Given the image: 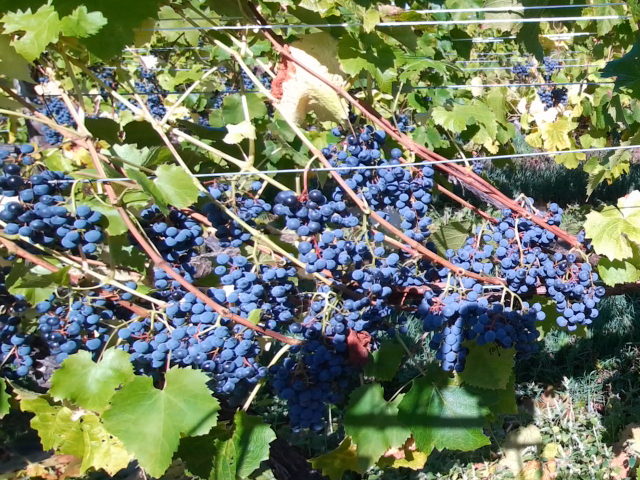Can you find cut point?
<instances>
[{
  "mask_svg": "<svg viewBox=\"0 0 640 480\" xmlns=\"http://www.w3.org/2000/svg\"><path fill=\"white\" fill-rule=\"evenodd\" d=\"M522 216H523V210L519 209L518 213H517V215H516V217H515V219L513 221V232H514V235L516 237V244L518 246L522 245L521 235H520L519 229H518V223L521 220Z\"/></svg>",
  "mask_w": 640,
  "mask_h": 480,
  "instance_id": "40658cd0",
  "label": "cut point"
},
{
  "mask_svg": "<svg viewBox=\"0 0 640 480\" xmlns=\"http://www.w3.org/2000/svg\"><path fill=\"white\" fill-rule=\"evenodd\" d=\"M499 283H500V285H501V286H502V288H503V289H502V293H501V298H502V299H505V298H506V296H507V294H508V295L510 296V299H509V303H510V304H513L515 300H516L517 302H520V301H521V298H520L519 294H518L517 292L512 291V290L509 288V286L505 283V280H504V278H503V277H500V278H499Z\"/></svg>",
  "mask_w": 640,
  "mask_h": 480,
  "instance_id": "6a23745f",
  "label": "cut point"
},
{
  "mask_svg": "<svg viewBox=\"0 0 640 480\" xmlns=\"http://www.w3.org/2000/svg\"><path fill=\"white\" fill-rule=\"evenodd\" d=\"M318 159V154L314 153L313 157H311L307 164L304 166L306 168V171L302 174V185H303V190L307 191L308 190V182H307V176H308V170L312 167L313 163Z\"/></svg>",
  "mask_w": 640,
  "mask_h": 480,
  "instance_id": "deb38ca7",
  "label": "cut point"
},
{
  "mask_svg": "<svg viewBox=\"0 0 640 480\" xmlns=\"http://www.w3.org/2000/svg\"><path fill=\"white\" fill-rule=\"evenodd\" d=\"M367 218H368V210L364 209L363 210V216H362V230L356 234L357 238H363L364 243L366 244V246L368 248L372 247V243L369 241L368 236H367Z\"/></svg>",
  "mask_w": 640,
  "mask_h": 480,
  "instance_id": "7d7e1d6f",
  "label": "cut point"
}]
</instances>
